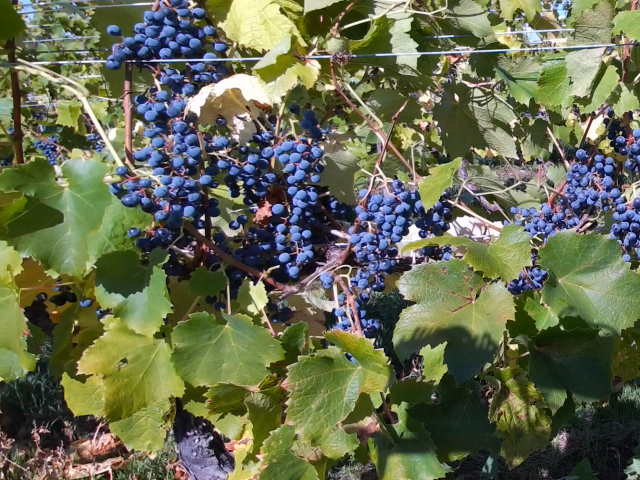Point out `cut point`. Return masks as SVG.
Masks as SVG:
<instances>
[{"label":"cut point","mask_w":640,"mask_h":480,"mask_svg":"<svg viewBox=\"0 0 640 480\" xmlns=\"http://www.w3.org/2000/svg\"><path fill=\"white\" fill-rule=\"evenodd\" d=\"M134 172H139V173H141V174H143V175H145V176H147V177H149V178L153 179L154 181H158V179H157L155 176L151 175V174H150V173H148V172L143 171L142 169H137V168H135Z\"/></svg>","instance_id":"cut-point-1"},{"label":"cut point","mask_w":640,"mask_h":480,"mask_svg":"<svg viewBox=\"0 0 640 480\" xmlns=\"http://www.w3.org/2000/svg\"><path fill=\"white\" fill-rule=\"evenodd\" d=\"M282 117H284L285 119H287V120H288V122H289V123L291 124V126H292L291 132H294V131H295V123H294V121H293V120L290 118V116H288L287 114H283V116H282Z\"/></svg>","instance_id":"cut-point-2"}]
</instances>
